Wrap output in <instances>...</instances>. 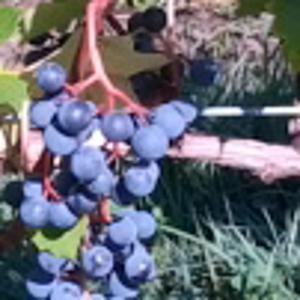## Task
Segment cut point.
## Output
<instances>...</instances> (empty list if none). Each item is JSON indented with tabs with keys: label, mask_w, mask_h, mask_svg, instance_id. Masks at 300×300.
<instances>
[{
	"label": "cut point",
	"mask_w": 300,
	"mask_h": 300,
	"mask_svg": "<svg viewBox=\"0 0 300 300\" xmlns=\"http://www.w3.org/2000/svg\"><path fill=\"white\" fill-rule=\"evenodd\" d=\"M97 5L98 4H94L92 2V4L88 8L87 17H86V26H87V31L89 33L88 41L90 42V60H91L92 69L95 74L88 75L81 82L75 83L71 87V90L73 92H76L77 90H81L85 88L89 83L99 80L124 103H130L132 101V98L130 96L125 95L114 83H112L105 76L101 53L98 51L97 43L94 36L96 20H97V16L94 13H95V7Z\"/></svg>",
	"instance_id": "6a23745f"
}]
</instances>
